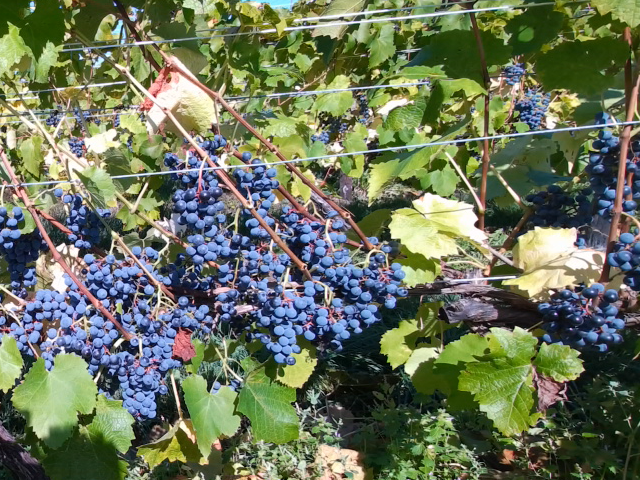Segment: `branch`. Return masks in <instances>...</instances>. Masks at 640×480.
Instances as JSON below:
<instances>
[{
	"instance_id": "branch-10",
	"label": "branch",
	"mask_w": 640,
	"mask_h": 480,
	"mask_svg": "<svg viewBox=\"0 0 640 480\" xmlns=\"http://www.w3.org/2000/svg\"><path fill=\"white\" fill-rule=\"evenodd\" d=\"M115 196L120 199V201L126 205L131 211H133L136 215H138L139 217H141L144 221L148 222L152 227H154L155 229H157L158 231H160L162 234H164L167 238H169L170 240H172L174 243H177L179 246L183 247L184 249L188 248V244L183 242L180 238H177L176 236H174L172 233L168 232L165 228H163L162 226H160L158 223H156L154 220H152L150 217H148L147 215H145L142 211H140L137 207H135L133 204H131L130 201H128L119 191L115 192Z\"/></svg>"
},
{
	"instance_id": "branch-3",
	"label": "branch",
	"mask_w": 640,
	"mask_h": 480,
	"mask_svg": "<svg viewBox=\"0 0 640 480\" xmlns=\"http://www.w3.org/2000/svg\"><path fill=\"white\" fill-rule=\"evenodd\" d=\"M632 131V125H627L621 132L620 137L622 138V145L620 148V164L618 170V180L615 189L616 203H615V211L612 214L610 220V235H609V244L607 245V251H614V243L617 238V223L620 215L622 214V206H623V188L625 183V173L627 167V150L629 148V133ZM620 229L619 233L623 234L624 232H629L631 228V220L625 216L620 217Z\"/></svg>"
},
{
	"instance_id": "branch-7",
	"label": "branch",
	"mask_w": 640,
	"mask_h": 480,
	"mask_svg": "<svg viewBox=\"0 0 640 480\" xmlns=\"http://www.w3.org/2000/svg\"><path fill=\"white\" fill-rule=\"evenodd\" d=\"M301 180L304 184H306L309 188H311L318 196H320L321 199H323L328 205L329 207L334 210L337 214H339L340 216H343L345 218V220L353 227L354 231L357 233V235L361 238V240L365 243V245H362L360 243H357L356 241L353 240H348L347 244L350 246H353L355 248H358L364 252H368V251H373L374 247L371 244V242L368 240V238L363 234V232L360 230L359 226L354 222V218L348 214L345 211H342L339 207H337L336 205H334V203L332 202V200L327 197L325 195L324 192H322L321 190L318 189V187L313 184L312 182H310L306 176L297 168L295 167V165H287Z\"/></svg>"
},
{
	"instance_id": "branch-12",
	"label": "branch",
	"mask_w": 640,
	"mask_h": 480,
	"mask_svg": "<svg viewBox=\"0 0 640 480\" xmlns=\"http://www.w3.org/2000/svg\"><path fill=\"white\" fill-rule=\"evenodd\" d=\"M470 16V20H471V24L473 27V32L474 35L476 37V41L480 50V54H481V65H482V71H483V82H484V88L486 91L490 90V85H489V80H488V68H487V62H486V51L481 39V35L480 32L478 30V24L476 21V17H475V13L469 14Z\"/></svg>"
},
{
	"instance_id": "branch-15",
	"label": "branch",
	"mask_w": 640,
	"mask_h": 480,
	"mask_svg": "<svg viewBox=\"0 0 640 480\" xmlns=\"http://www.w3.org/2000/svg\"><path fill=\"white\" fill-rule=\"evenodd\" d=\"M0 157L2 158L4 166L6 167L7 171L9 172L13 183H19V180H18V178H17V176L15 174V171L12 169L6 154L3 152V147L2 146H0Z\"/></svg>"
},
{
	"instance_id": "branch-1",
	"label": "branch",
	"mask_w": 640,
	"mask_h": 480,
	"mask_svg": "<svg viewBox=\"0 0 640 480\" xmlns=\"http://www.w3.org/2000/svg\"><path fill=\"white\" fill-rule=\"evenodd\" d=\"M8 191L11 192L14 196H18L24 203H26V206L28 208V211L30 213V216H31L33 222L35 223L38 231L41 233V235L43 236V238L45 239L47 244L49 245L53 255L55 256V259L61 265L63 270L66 272V274L68 276H70V278L74 281V283L77 285L79 290L81 292H83L89 298L90 302L97 309H99L101 313L104 314V316L107 318V320L111 324H113L124 335V337L126 338L127 341H131L132 337L128 333V331L126 329H124V327L111 316V314L105 309V307L102 305L101 302H98L95 299V297L92 295V293L87 288H85L83 286V284L80 282L79 278L77 276H75V274L70 270V268L67 266L66 262L63 261L62 258H60V253L57 251L56 246L54 245L52 239L49 237L47 232L42 227V224L40 223V221H39V219H38V217L36 216L35 213H37L41 217H43L46 220H48L52 225H54L55 227L61 229L67 235L71 234V230L69 228H67L66 226H64L63 224H61L58 221H56L51 215H49L46 212H44L41 209H39L36 206V204L29 199V196L27 195V192L25 191L24 188L23 189L8 188Z\"/></svg>"
},
{
	"instance_id": "branch-8",
	"label": "branch",
	"mask_w": 640,
	"mask_h": 480,
	"mask_svg": "<svg viewBox=\"0 0 640 480\" xmlns=\"http://www.w3.org/2000/svg\"><path fill=\"white\" fill-rule=\"evenodd\" d=\"M85 203L87 204L88 208L92 211L95 212L98 216V220L102 222V224L106 227V229L108 230V232L114 237V239L116 240L117 243H119L122 247V249L124 250L125 254L127 256H129L137 265L140 266L141 271L147 275L152 281L153 284L158 287L161 291H163L169 298H171L174 301L178 300V297L173 294L166 286H164L163 284H161L158 280H155L148 272L147 270L144 268V266L141 264V262L139 261V258L130 251L129 247L126 245L125 241L120 238V236L118 235V233L116 231L113 230L112 226L108 223V221L103 217L99 215V212L97 211V208L92 204L90 199H86Z\"/></svg>"
},
{
	"instance_id": "branch-5",
	"label": "branch",
	"mask_w": 640,
	"mask_h": 480,
	"mask_svg": "<svg viewBox=\"0 0 640 480\" xmlns=\"http://www.w3.org/2000/svg\"><path fill=\"white\" fill-rule=\"evenodd\" d=\"M214 173L221 176V180L226 185H228L230 190L235 195L237 201L241 203L245 208H247L254 215V217L258 220L260 225L273 237L274 242L277 243L278 246L292 259V261L298 265V269L302 273H304L309 280L315 283L316 282L315 279L310 276L309 266L307 264H304L298 257H296V255L290 249L287 248V246L283 243V241L279 239V235L271 227H269L266 224V222L260 216L259 212L250 204L248 200H246L239 193L238 189L236 188L237 183L232 179V177L225 170L214 171Z\"/></svg>"
},
{
	"instance_id": "branch-16",
	"label": "branch",
	"mask_w": 640,
	"mask_h": 480,
	"mask_svg": "<svg viewBox=\"0 0 640 480\" xmlns=\"http://www.w3.org/2000/svg\"><path fill=\"white\" fill-rule=\"evenodd\" d=\"M145 59L156 69L157 72L161 71L160 65L151 57V53L145 46L140 47Z\"/></svg>"
},
{
	"instance_id": "branch-6",
	"label": "branch",
	"mask_w": 640,
	"mask_h": 480,
	"mask_svg": "<svg viewBox=\"0 0 640 480\" xmlns=\"http://www.w3.org/2000/svg\"><path fill=\"white\" fill-rule=\"evenodd\" d=\"M95 53L103 61L110 63L112 66H115L116 68L120 69L122 73L125 74L133 82V84L138 89H140V91L143 94L148 96L163 112H165L168 118L171 119V121L173 122L176 129L179 132H181L183 135H185V137L189 140L190 144L201 154V157L206 162H208L210 166L220 165L219 163H216L215 161L212 160V158L207 154V152L197 144L193 136L190 133H188V131L180 125L177 118L171 113V111L166 106H164L161 103V101L157 97H155L149 90H147L144 86H142L141 83L138 81V79L133 74H131L130 71L127 70L123 64H120L117 61H114L112 58L105 56V54L102 51H95Z\"/></svg>"
},
{
	"instance_id": "branch-4",
	"label": "branch",
	"mask_w": 640,
	"mask_h": 480,
	"mask_svg": "<svg viewBox=\"0 0 640 480\" xmlns=\"http://www.w3.org/2000/svg\"><path fill=\"white\" fill-rule=\"evenodd\" d=\"M153 49L158 53V55L165 59L169 66L171 68L176 69L179 73H181L187 80H189L196 88H198L200 91H202L203 93L209 94L211 95L214 99H217L220 104L222 105L223 108L227 109L230 114L237 120V122L247 128L249 131H251L261 142L264 143V146L266 149H268L271 153L275 154L277 157L280 158V160H287V157L284 156V154L282 153L281 149L279 147H277L276 144H274L272 141L267 140L266 137H263V135L261 133H259L251 124L245 122L241 116L233 109V107L230 104H227L225 99L219 95L217 92H215L214 90L210 89L209 87H206L204 84L198 82L197 80H195L188 72H186L183 68H181L177 63H174V61L172 60V58L170 56H168L166 53H164L160 47L158 45H152Z\"/></svg>"
},
{
	"instance_id": "branch-9",
	"label": "branch",
	"mask_w": 640,
	"mask_h": 480,
	"mask_svg": "<svg viewBox=\"0 0 640 480\" xmlns=\"http://www.w3.org/2000/svg\"><path fill=\"white\" fill-rule=\"evenodd\" d=\"M632 61L627 59L624 62L625 68V91H626V110L627 118L625 121H632L634 119V113L638 98L640 95V75L635 77L634 88H632Z\"/></svg>"
},
{
	"instance_id": "branch-17",
	"label": "branch",
	"mask_w": 640,
	"mask_h": 480,
	"mask_svg": "<svg viewBox=\"0 0 640 480\" xmlns=\"http://www.w3.org/2000/svg\"><path fill=\"white\" fill-rule=\"evenodd\" d=\"M609 272H610V265L608 263H605L603 268V273H602V276L599 277V281L607 283L609 280Z\"/></svg>"
},
{
	"instance_id": "branch-13",
	"label": "branch",
	"mask_w": 640,
	"mask_h": 480,
	"mask_svg": "<svg viewBox=\"0 0 640 480\" xmlns=\"http://www.w3.org/2000/svg\"><path fill=\"white\" fill-rule=\"evenodd\" d=\"M278 190L284 194V196L287 198V200L291 204H293L296 208H298V210L301 211L304 215H306L312 222L317 221V218L306 208H303V206L297 200H295L292 197V195L283 186H279Z\"/></svg>"
},
{
	"instance_id": "branch-14",
	"label": "branch",
	"mask_w": 640,
	"mask_h": 480,
	"mask_svg": "<svg viewBox=\"0 0 640 480\" xmlns=\"http://www.w3.org/2000/svg\"><path fill=\"white\" fill-rule=\"evenodd\" d=\"M116 9L118 10L119 13L122 14L124 22L128 28V30L130 31V33L134 36V38L136 39V41H141V36L138 34V32L134 29V27L132 26L130 19L128 17L127 11L125 9H123L121 7V3L117 2L116 3Z\"/></svg>"
},
{
	"instance_id": "branch-2",
	"label": "branch",
	"mask_w": 640,
	"mask_h": 480,
	"mask_svg": "<svg viewBox=\"0 0 640 480\" xmlns=\"http://www.w3.org/2000/svg\"><path fill=\"white\" fill-rule=\"evenodd\" d=\"M4 78L7 81L8 85L15 92V94L19 97V100L24 105L25 110L31 115V117L35 121L37 127H35L30 121H27V119L24 118V116L10 102H8V101H6L4 99H0V104L6 106L25 125L26 128L32 130L37 135H39L42 138H44L48 142L49 146L52 148L55 156L57 157V159L59 160V162H60V164L62 166L66 165V161L62 157L59 149L61 150V152L63 154H65L70 159H72V161L75 164H77L78 166H81L82 168H85L86 167V163L84 161H81L80 159H78L72 152L67 150L63 144L57 142L56 140L52 139L48 135L47 131L45 130V128H44L43 124L41 123L40 119L38 118L37 114L35 113L34 110H32V108L30 107L28 101L26 100L24 95L21 93V91L18 89L16 84L12 81V79L9 76L8 73L4 74Z\"/></svg>"
},
{
	"instance_id": "branch-11",
	"label": "branch",
	"mask_w": 640,
	"mask_h": 480,
	"mask_svg": "<svg viewBox=\"0 0 640 480\" xmlns=\"http://www.w3.org/2000/svg\"><path fill=\"white\" fill-rule=\"evenodd\" d=\"M489 166V140L483 141L482 189L480 190V209L478 229L484 231L485 194L487 193V172Z\"/></svg>"
}]
</instances>
